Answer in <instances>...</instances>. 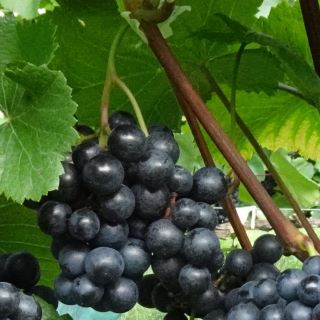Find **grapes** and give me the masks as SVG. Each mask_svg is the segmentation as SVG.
Instances as JSON below:
<instances>
[{"label":"grapes","instance_id":"obj_2","mask_svg":"<svg viewBox=\"0 0 320 320\" xmlns=\"http://www.w3.org/2000/svg\"><path fill=\"white\" fill-rule=\"evenodd\" d=\"M73 128L76 131H78L79 133H81L83 136H87V135L95 133V132L91 131V128H89L88 126L78 125V122H75V125L73 126Z\"/></svg>","mask_w":320,"mask_h":320},{"label":"grapes","instance_id":"obj_3","mask_svg":"<svg viewBox=\"0 0 320 320\" xmlns=\"http://www.w3.org/2000/svg\"><path fill=\"white\" fill-rule=\"evenodd\" d=\"M74 117L76 118V120H78V117L74 114Z\"/></svg>","mask_w":320,"mask_h":320},{"label":"grapes","instance_id":"obj_1","mask_svg":"<svg viewBox=\"0 0 320 320\" xmlns=\"http://www.w3.org/2000/svg\"><path fill=\"white\" fill-rule=\"evenodd\" d=\"M107 152L98 137L70 146L58 190L39 202L40 230L52 236L61 273L48 286L27 252L0 256V320H41L32 295L53 304L123 313L136 303L168 312L164 320H320V256L280 272L290 256L277 235L264 234L252 251L224 254L212 231L231 176L203 167L194 176L170 128L153 125L146 139L126 111L108 117Z\"/></svg>","mask_w":320,"mask_h":320}]
</instances>
